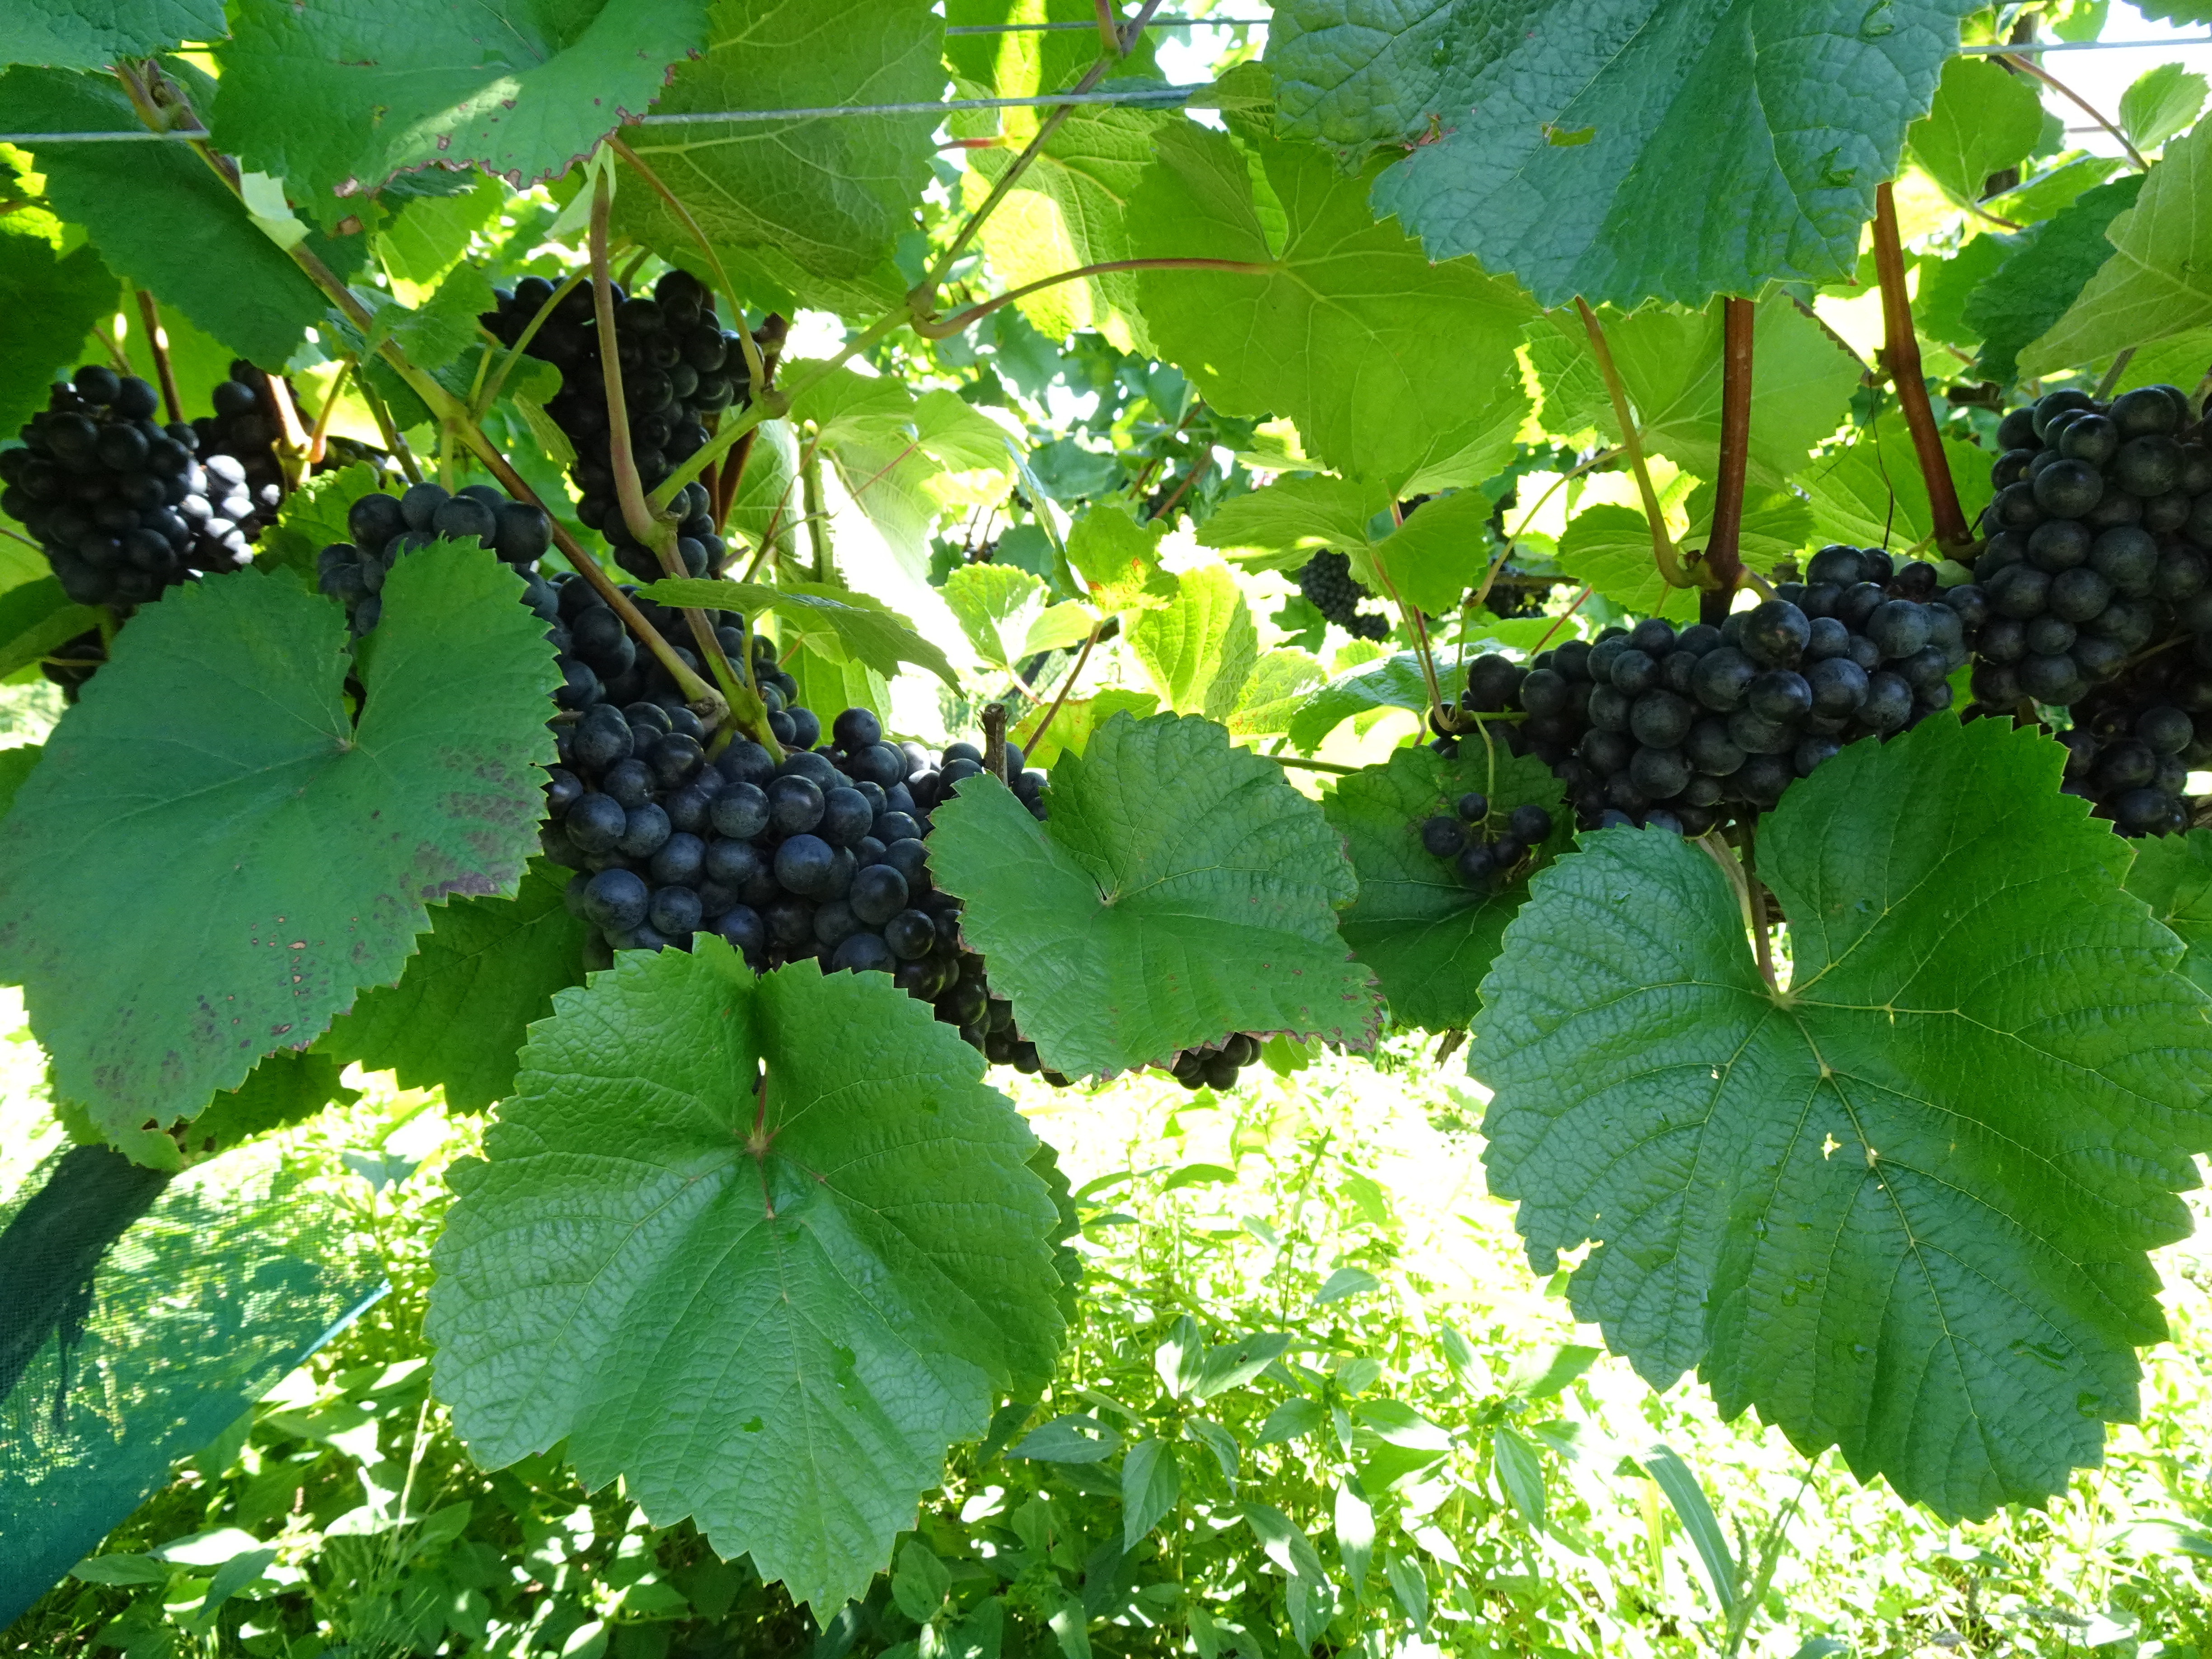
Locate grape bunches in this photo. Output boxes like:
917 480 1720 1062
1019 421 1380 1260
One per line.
550 572 820 750
818 709 989 1012
540 701 871 971
2054 705 2194 837
170 454 256 573
317 483 560 681
905 743 1075 1087
1970 385 2212 709
1422 792 1551 880
2072 639 2211 768
6 365 202 624
477 268 763 585
1428 640 1597 769
1171 1032 1261 1091
1566 619 1723 836
194 359 409 518
1693 545 1992 814
41 624 107 706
